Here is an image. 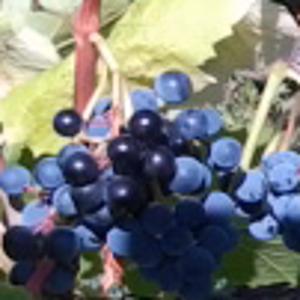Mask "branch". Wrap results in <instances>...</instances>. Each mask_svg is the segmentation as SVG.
<instances>
[{
    "mask_svg": "<svg viewBox=\"0 0 300 300\" xmlns=\"http://www.w3.org/2000/svg\"><path fill=\"white\" fill-rule=\"evenodd\" d=\"M73 95L76 111L85 115L96 88V45L101 19L100 0H83Z\"/></svg>",
    "mask_w": 300,
    "mask_h": 300,
    "instance_id": "1",
    "label": "branch"
}]
</instances>
